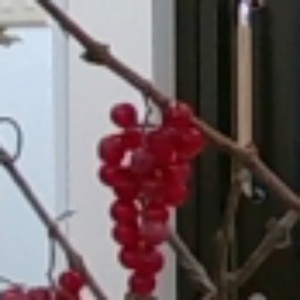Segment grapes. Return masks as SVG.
Here are the masks:
<instances>
[{
	"instance_id": "1",
	"label": "grapes",
	"mask_w": 300,
	"mask_h": 300,
	"mask_svg": "<svg viewBox=\"0 0 300 300\" xmlns=\"http://www.w3.org/2000/svg\"><path fill=\"white\" fill-rule=\"evenodd\" d=\"M110 118L122 131L99 139L97 155L105 162L99 177L113 185L118 196L109 213L118 223L112 237L123 245L119 261L134 269L127 287L135 295L148 296L165 265L155 246L170 234L167 208H179L190 198L192 159L204 147L205 130L185 99L168 104L162 123L138 124L139 110L131 102L114 105Z\"/></svg>"
}]
</instances>
